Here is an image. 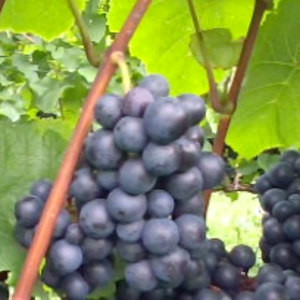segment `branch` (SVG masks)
<instances>
[{
    "instance_id": "30e6481e",
    "label": "branch",
    "mask_w": 300,
    "mask_h": 300,
    "mask_svg": "<svg viewBox=\"0 0 300 300\" xmlns=\"http://www.w3.org/2000/svg\"><path fill=\"white\" fill-rule=\"evenodd\" d=\"M66 6L71 11L80 30L85 57L93 67H101V69L87 94L84 107L65 154L62 168L52 185L48 200L39 217L38 226L28 247L12 300H32L34 284L38 277L42 258L46 254L58 213L66 201L70 184L81 161L84 139L87 137L93 122L94 99L106 91L108 82L114 73L115 64L112 62L110 55L115 50H122V53H125V48L140 26L150 3L145 1L134 2L122 29L115 35L113 42L106 50V55H99L98 57L94 52L90 29L82 19L79 10L72 1H68Z\"/></svg>"
},
{
    "instance_id": "325d2c04",
    "label": "branch",
    "mask_w": 300,
    "mask_h": 300,
    "mask_svg": "<svg viewBox=\"0 0 300 300\" xmlns=\"http://www.w3.org/2000/svg\"><path fill=\"white\" fill-rule=\"evenodd\" d=\"M186 3L192 16L196 35L199 40L201 57L205 65L207 76L209 79V84L212 90L211 104L213 109L222 115L217 123V136L213 143L211 151L215 154H222L224 152V145L227 138L228 126L232 115L236 109V105L239 103V98L242 94V87L251 60L252 48L255 43V36L258 29V25L261 22L263 12L267 7L271 6V2L266 0H260L255 5L251 25L246 35V39L241 51L240 60L233 80V84L229 90V99L225 102V104L222 101L219 89L214 81L211 65L206 54L204 37L201 32V28L199 25L197 13L194 8L193 2L191 0H186Z\"/></svg>"
}]
</instances>
